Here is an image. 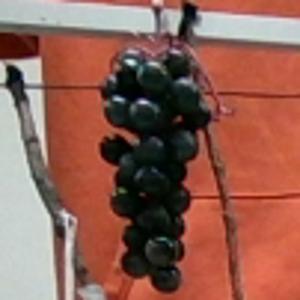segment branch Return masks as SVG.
Returning a JSON list of instances; mask_svg holds the SVG:
<instances>
[{
  "label": "branch",
  "mask_w": 300,
  "mask_h": 300,
  "mask_svg": "<svg viewBox=\"0 0 300 300\" xmlns=\"http://www.w3.org/2000/svg\"><path fill=\"white\" fill-rule=\"evenodd\" d=\"M179 1L180 21L178 22L177 27L176 42L178 44L176 48L184 49L190 55L194 65V71L191 75V79L203 90L205 99V86L203 85L202 68L197 62L195 56L191 53V49L193 48L194 28L199 27L202 24V16L198 14L200 6L192 3L190 0Z\"/></svg>",
  "instance_id": "170604dd"
},
{
  "label": "branch",
  "mask_w": 300,
  "mask_h": 300,
  "mask_svg": "<svg viewBox=\"0 0 300 300\" xmlns=\"http://www.w3.org/2000/svg\"><path fill=\"white\" fill-rule=\"evenodd\" d=\"M204 135V144L207 150L210 169L216 182L221 205V217L225 234L226 250L228 255V274L231 284L232 300H246L243 291V280L240 264L239 241L233 204L229 197L226 179V163L222 159L221 148L218 146L214 123L205 130H199Z\"/></svg>",
  "instance_id": "325d2c04"
},
{
  "label": "branch",
  "mask_w": 300,
  "mask_h": 300,
  "mask_svg": "<svg viewBox=\"0 0 300 300\" xmlns=\"http://www.w3.org/2000/svg\"><path fill=\"white\" fill-rule=\"evenodd\" d=\"M6 80L4 89L11 95L20 126V137L33 187L38 191L52 227L67 247L70 271L83 292L82 300H104L91 279L89 270L77 244L76 238L65 218L62 200L58 197L51 175L45 167L41 140L31 111V97L26 89V74L16 63L5 62Z\"/></svg>",
  "instance_id": "30e6481e"
}]
</instances>
